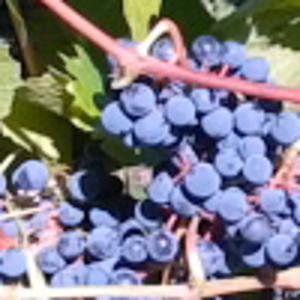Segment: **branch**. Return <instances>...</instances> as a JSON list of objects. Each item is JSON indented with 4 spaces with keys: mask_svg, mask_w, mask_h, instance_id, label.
<instances>
[{
    "mask_svg": "<svg viewBox=\"0 0 300 300\" xmlns=\"http://www.w3.org/2000/svg\"><path fill=\"white\" fill-rule=\"evenodd\" d=\"M38 5L41 10L49 11L59 23L101 49L109 58L132 66L141 74L151 77V82L157 89L166 88L171 78H175L206 89H236L251 93L257 99H277L283 104L300 105V90L255 84L231 75L217 74L170 62L161 64L153 56L142 57L133 49L114 43L112 37L106 35L94 21L63 0H38Z\"/></svg>",
    "mask_w": 300,
    "mask_h": 300,
    "instance_id": "1",
    "label": "branch"
},
{
    "mask_svg": "<svg viewBox=\"0 0 300 300\" xmlns=\"http://www.w3.org/2000/svg\"><path fill=\"white\" fill-rule=\"evenodd\" d=\"M280 289H300V270L266 274L237 275L217 282L164 285H98L51 288L0 287V300H101L105 298H163L165 300H204L205 297H223Z\"/></svg>",
    "mask_w": 300,
    "mask_h": 300,
    "instance_id": "2",
    "label": "branch"
}]
</instances>
